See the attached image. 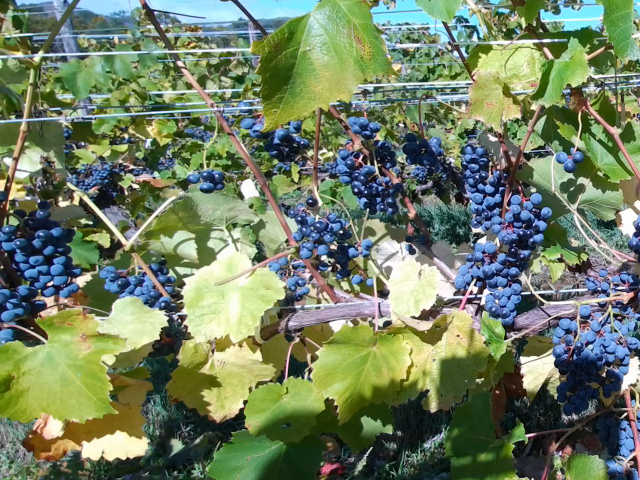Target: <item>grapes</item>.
<instances>
[{
    "label": "grapes",
    "instance_id": "obj_15",
    "mask_svg": "<svg viewBox=\"0 0 640 480\" xmlns=\"http://www.w3.org/2000/svg\"><path fill=\"white\" fill-rule=\"evenodd\" d=\"M149 268L156 275L158 280L164 285L169 294L175 291V287L171 284L177 282V278L175 276H169V268L166 265H163L161 262H152L149 265Z\"/></svg>",
    "mask_w": 640,
    "mask_h": 480
},
{
    "label": "grapes",
    "instance_id": "obj_20",
    "mask_svg": "<svg viewBox=\"0 0 640 480\" xmlns=\"http://www.w3.org/2000/svg\"><path fill=\"white\" fill-rule=\"evenodd\" d=\"M613 308L616 312H621L624 316L633 317L634 319L640 318L639 312H634L630 305L625 304L623 301L615 302L613 304Z\"/></svg>",
    "mask_w": 640,
    "mask_h": 480
},
{
    "label": "grapes",
    "instance_id": "obj_4",
    "mask_svg": "<svg viewBox=\"0 0 640 480\" xmlns=\"http://www.w3.org/2000/svg\"><path fill=\"white\" fill-rule=\"evenodd\" d=\"M286 216L293 218L298 224L297 230L293 232L294 239L302 242L298 247V255L303 259H310L315 249L318 255L333 258L342 269L335 275L337 280H344L350 276V271L347 269L350 259L371 255L373 242L370 239H364L361 242V250L353 245H346V239L352 237V232L347 229L349 221L339 218L334 212H329L324 218L318 217L315 220L308 212L290 208Z\"/></svg>",
    "mask_w": 640,
    "mask_h": 480
},
{
    "label": "grapes",
    "instance_id": "obj_13",
    "mask_svg": "<svg viewBox=\"0 0 640 480\" xmlns=\"http://www.w3.org/2000/svg\"><path fill=\"white\" fill-rule=\"evenodd\" d=\"M373 147L376 149V161L388 169L397 166L396 152L392 150V145L386 140H375Z\"/></svg>",
    "mask_w": 640,
    "mask_h": 480
},
{
    "label": "grapes",
    "instance_id": "obj_1",
    "mask_svg": "<svg viewBox=\"0 0 640 480\" xmlns=\"http://www.w3.org/2000/svg\"><path fill=\"white\" fill-rule=\"evenodd\" d=\"M461 168L464 172L461 179L467 184V194L474 203L471 213L475 215L470 220L473 228L482 231L491 230L501 244L509 245L508 252H501L496 263L485 254L496 251L494 241L478 242L473 245L474 253H466L464 261L455 276V287L468 290L472 284L493 292L485 296V309L490 318H501L504 326H511L517 316L516 304L522 301V282L518 277L528 268L525 260L532 255L536 244L544 241L543 232L548 229V222L552 217V209L543 207L539 210L534 205L542 203L540 193H532L530 200L519 195H513L510 208L501 219L502 200L506 192V180L510 175L508 167L494 169L489 172L488 156L483 146L465 145L463 147Z\"/></svg>",
    "mask_w": 640,
    "mask_h": 480
},
{
    "label": "grapes",
    "instance_id": "obj_21",
    "mask_svg": "<svg viewBox=\"0 0 640 480\" xmlns=\"http://www.w3.org/2000/svg\"><path fill=\"white\" fill-rule=\"evenodd\" d=\"M613 324L616 328L620 330L623 335H627L630 331H634L636 329V323L633 319L628 321V324L624 325L618 319L613 321Z\"/></svg>",
    "mask_w": 640,
    "mask_h": 480
},
{
    "label": "grapes",
    "instance_id": "obj_5",
    "mask_svg": "<svg viewBox=\"0 0 640 480\" xmlns=\"http://www.w3.org/2000/svg\"><path fill=\"white\" fill-rule=\"evenodd\" d=\"M336 173L341 183H351L352 194L360 200L362 209L369 208L371 215L385 212L388 215L398 213V204L394 196L402 190L400 182L393 183L387 176L374 175L375 166L364 164L359 169L350 149L337 151Z\"/></svg>",
    "mask_w": 640,
    "mask_h": 480
},
{
    "label": "grapes",
    "instance_id": "obj_19",
    "mask_svg": "<svg viewBox=\"0 0 640 480\" xmlns=\"http://www.w3.org/2000/svg\"><path fill=\"white\" fill-rule=\"evenodd\" d=\"M611 281L613 283H621L623 281V282H629V283H631L632 285H635V286H639L640 285L639 278L637 276H635L634 274L630 273L629 271H622L620 273V275L613 276L611 278Z\"/></svg>",
    "mask_w": 640,
    "mask_h": 480
},
{
    "label": "grapes",
    "instance_id": "obj_14",
    "mask_svg": "<svg viewBox=\"0 0 640 480\" xmlns=\"http://www.w3.org/2000/svg\"><path fill=\"white\" fill-rule=\"evenodd\" d=\"M585 159V155L576 151L575 147L571 148L570 156L565 151H560L555 155V161L558 164H562V170L567 174H571L576 171L578 164H581Z\"/></svg>",
    "mask_w": 640,
    "mask_h": 480
},
{
    "label": "grapes",
    "instance_id": "obj_7",
    "mask_svg": "<svg viewBox=\"0 0 640 480\" xmlns=\"http://www.w3.org/2000/svg\"><path fill=\"white\" fill-rule=\"evenodd\" d=\"M263 126L264 119L262 117L243 118L241 120V127L249 130L251 137L259 138L260 140H268L270 138L271 143L265 145V150L269 152L271 157L276 158L278 162H293L295 154L300 153L302 148L309 146L307 138L293 135V133L302 131V122L300 120H291L289 129L279 128L265 133L261 131Z\"/></svg>",
    "mask_w": 640,
    "mask_h": 480
},
{
    "label": "grapes",
    "instance_id": "obj_8",
    "mask_svg": "<svg viewBox=\"0 0 640 480\" xmlns=\"http://www.w3.org/2000/svg\"><path fill=\"white\" fill-rule=\"evenodd\" d=\"M406 142L402 146L407 165H429L436 156H443L445 149L441 147L442 139L438 136H432L430 142L427 139H421L418 143L413 132L406 134Z\"/></svg>",
    "mask_w": 640,
    "mask_h": 480
},
{
    "label": "grapes",
    "instance_id": "obj_6",
    "mask_svg": "<svg viewBox=\"0 0 640 480\" xmlns=\"http://www.w3.org/2000/svg\"><path fill=\"white\" fill-rule=\"evenodd\" d=\"M99 276L104 279L103 287L110 293H117L119 299L134 297L141 299L145 307L167 311H176L178 306L172 299L164 297L153 285L145 273L136 276L128 275L125 269L104 265L99 270Z\"/></svg>",
    "mask_w": 640,
    "mask_h": 480
},
{
    "label": "grapes",
    "instance_id": "obj_17",
    "mask_svg": "<svg viewBox=\"0 0 640 480\" xmlns=\"http://www.w3.org/2000/svg\"><path fill=\"white\" fill-rule=\"evenodd\" d=\"M585 285L589 288V292H594L600 289L601 291L608 292L611 284L606 280L596 281L593 277L587 276L585 278Z\"/></svg>",
    "mask_w": 640,
    "mask_h": 480
},
{
    "label": "grapes",
    "instance_id": "obj_18",
    "mask_svg": "<svg viewBox=\"0 0 640 480\" xmlns=\"http://www.w3.org/2000/svg\"><path fill=\"white\" fill-rule=\"evenodd\" d=\"M635 228L637 231L632 234V238L628 242V249L640 255V216L637 217Z\"/></svg>",
    "mask_w": 640,
    "mask_h": 480
},
{
    "label": "grapes",
    "instance_id": "obj_2",
    "mask_svg": "<svg viewBox=\"0 0 640 480\" xmlns=\"http://www.w3.org/2000/svg\"><path fill=\"white\" fill-rule=\"evenodd\" d=\"M39 211H32L25 218V226L30 236L16 239L18 233L15 225H6L1 229L0 247L5 253H12L13 270L18 276H24L30 284H21L16 292H12L0 283V322L15 325L18 317L38 314L47 308L44 299L34 300L41 289L44 297L53 294L70 297L79 289L76 281L81 274L78 266H72L69 257L72 248L69 244L76 238L73 228L60 227L57 221H51L53 211L46 200L38 203Z\"/></svg>",
    "mask_w": 640,
    "mask_h": 480
},
{
    "label": "grapes",
    "instance_id": "obj_3",
    "mask_svg": "<svg viewBox=\"0 0 640 480\" xmlns=\"http://www.w3.org/2000/svg\"><path fill=\"white\" fill-rule=\"evenodd\" d=\"M603 318L601 312L594 313L589 317V329L580 334V338L575 342L571 333L567 330L575 332L577 330V322L563 318L559 320V326L554 329L552 342L556 345L552 349V355L556 358L555 367L560 369L562 364L569 358L577 361L579 357L585 359L596 369L602 370L607 363H614L620 360L622 364L619 369L609 368L605 371L608 379L614 377L617 381L625 379L624 374L630 371V355L632 350H640V340L636 337L629 336L625 339L628 344L626 347L617 345L615 339L620 337L618 332L611 333L609 325H603L600 321Z\"/></svg>",
    "mask_w": 640,
    "mask_h": 480
},
{
    "label": "grapes",
    "instance_id": "obj_9",
    "mask_svg": "<svg viewBox=\"0 0 640 480\" xmlns=\"http://www.w3.org/2000/svg\"><path fill=\"white\" fill-rule=\"evenodd\" d=\"M189 183H199V190L204 195H210L215 190L224 188L223 173L215 169H207L200 174L191 173L187 176Z\"/></svg>",
    "mask_w": 640,
    "mask_h": 480
},
{
    "label": "grapes",
    "instance_id": "obj_11",
    "mask_svg": "<svg viewBox=\"0 0 640 480\" xmlns=\"http://www.w3.org/2000/svg\"><path fill=\"white\" fill-rule=\"evenodd\" d=\"M348 124L351 126L354 135L361 134L365 140H373L376 137V133L381 130V125L378 122H373L365 116L350 115Z\"/></svg>",
    "mask_w": 640,
    "mask_h": 480
},
{
    "label": "grapes",
    "instance_id": "obj_12",
    "mask_svg": "<svg viewBox=\"0 0 640 480\" xmlns=\"http://www.w3.org/2000/svg\"><path fill=\"white\" fill-rule=\"evenodd\" d=\"M606 465L609 467L607 473L610 475L609 480H640L639 471L635 468H627L620 465L614 457L606 459Z\"/></svg>",
    "mask_w": 640,
    "mask_h": 480
},
{
    "label": "grapes",
    "instance_id": "obj_10",
    "mask_svg": "<svg viewBox=\"0 0 640 480\" xmlns=\"http://www.w3.org/2000/svg\"><path fill=\"white\" fill-rule=\"evenodd\" d=\"M611 434L618 439L617 454L621 457H629L635 450V438L630 421L622 419L617 423V427L611 430Z\"/></svg>",
    "mask_w": 640,
    "mask_h": 480
},
{
    "label": "grapes",
    "instance_id": "obj_16",
    "mask_svg": "<svg viewBox=\"0 0 640 480\" xmlns=\"http://www.w3.org/2000/svg\"><path fill=\"white\" fill-rule=\"evenodd\" d=\"M306 285L307 280L303 277H299L298 275H293L287 280V287L294 294V299L296 301H301L304 295H308L310 293V289Z\"/></svg>",
    "mask_w": 640,
    "mask_h": 480
}]
</instances>
